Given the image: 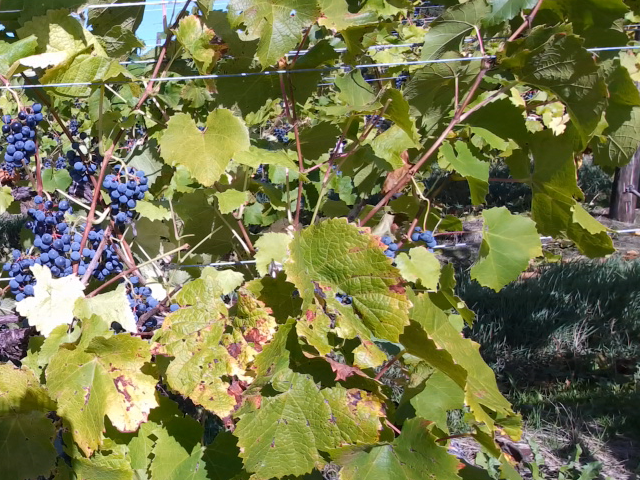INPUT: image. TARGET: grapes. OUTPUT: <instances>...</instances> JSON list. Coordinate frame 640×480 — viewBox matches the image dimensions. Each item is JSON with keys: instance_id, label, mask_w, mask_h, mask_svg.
<instances>
[{"instance_id": "1", "label": "grapes", "mask_w": 640, "mask_h": 480, "mask_svg": "<svg viewBox=\"0 0 640 480\" xmlns=\"http://www.w3.org/2000/svg\"><path fill=\"white\" fill-rule=\"evenodd\" d=\"M59 211L53 214L45 213L41 209H30L28 215L34 218V221H26L24 228L32 231L35 235L33 245L40 247L41 253L39 257L31 259L19 260L22 252L19 249L11 251L12 258L19 260L18 262H5L1 265L3 271H9L8 275L12 278L7 282L10 292L16 295L18 302L24 301L26 295L34 293L33 287L36 280L31 272H25L31 269L35 264L45 265L50 269V273L55 277H65L71 275L73 261L81 259L80 244L82 236L75 233L69 234V225L66 222H58V219L64 217V212L72 214L74 209L68 201H61L58 204Z\"/></svg>"}, {"instance_id": "2", "label": "grapes", "mask_w": 640, "mask_h": 480, "mask_svg": "<svg viewBox=\"0 0 640 480\" xmlns=\"http://www.w3.org/2000/svg\"><path fill=\"white\" fill-rule=\"evenodd\" d=\"M42 110L43 104L34 102L31 105V111L34 114H29L27 110H21L17 114V118L25 122V125L13 123L11 129L14 133L7 136L6 142L9 145L6 147L3 160L7 162L10 168H21L23 165L28 167L30 165L31 156L37 152L35 141L32 139L36 136L34 127L37 122L43 120Z\"/></svg>"}, {"instance_id": "3", "label": "grapes", "mask_w": 640, "mask_h": 480, "mask_svg": "<svg viewBox=\"0 0 640 480\" xmlns=\"http://www.w3.org/2000/svg\"><path fill=\"white\" fill-rule=\"evenodd\" d=\"M127 172L131 176H136L137 180L129 182H120L113 174H107L103 178L101 186L109 192V203L112 213L116 215L115 222L124 224L127 217L132 218L135 215L133 211L137 207V200L142 201L145 198V192L150 188L149 178L144 170L129 167Z\"/></svg>"}, {"instance_id": "4", "label": "grapes", "mask_w": 640, "mask_h": 480, "mask_svg": "<svg viewBox=\"0 0 640 480\" xmlns=\"http://www.w3.org/2000/svg\"><path fill=\"white\" fill-rule=\"evenodd\" d=\"M115 248L120 249V245L118 243H114V247L113 245H105L103 247L105 259L107 260V262L105 263V268L99 271L98 269L99 267H101V263H97L95 269L92 271V274L96 276V279L98 281H103L113 272L120 273L123 270V263L119 261V257L117 255L113 254L115 252Z\"/></svg>"}, {"instance_id": "5", "label": "grapes", "mask_w": 640, "mask_h": 480, "mask_svg": "<svg viewBox=\"0 0 640 480\" xmlns=\"http://www.w3.org/2000/svg\"><path fill=\"white\" fill-rule=\"evenodd\" d=\"M134 294L136 296H143L145 297L146 303L144 304L142 300L140 299H134L133 298V293L129 292L126 295V298L129 300V305L131 307H137V309L134 311V319L136 321L140 320V311H151L153 310L155 307H157L159 305V299L158 298H154L153 296H151L153 294V290L150 287H135L134 288Z\"/></svg>"}, {"instance_id": "6", "label": "grapes", "mask_w": 640, "mask_h": 480, "mask_svg": "<svg viewBox=\"0 0 640 480\" xmlns=\"http://www.w3.org/2000/svg\"><path fill=\"white\" fill-rule=\"evenodd\" d=\"M67 157L69 158V164L73 167L69 170V174L74 182L86 184L89 181V177L84 172L87 170L89 173H95L98 170L96 163H90L86 166L74 150H69Z\"/></svg>"}, {"instance_id": "7", "label": "grapes", "mask_w": 640, "mask_h": 480, "mask_svg": "<svg viewBox=\"0 0 640 480\" xmlns=\"http://www.w3.org/2000/svg\"><path fill=\"white\" fill-rule=\"evenodd\" d=\"M414 233L411 235V239L415 242L424 241L428 246L427 251L429 253H434L439 244V239L434 237L433 232L430 229H425L421 226H416L414 228Z\"/></svg>"}, {"instance_id": "8", "label": "grapes", "mask_w": 640, "mask_h": 480, "mask_svg": "<svg viewBox=\"0 0 640 480\" xmlns=\"http://www.w3.org/2000/svg\"><path fill=\"white\" fill-rule=\"evenodd\" d=\"M380 240L389 248L384 251V254L389 258H394L396 256V252L399 249V245L396 242L392 243V238L389 235H382L380 237Z\"/></svg>"}, {"instance_id": "9", "label": "grapes", "mask_w": 640, "mask_h": 480, "mask_svg": "<svg viewBox=\"0 0 640 480\" xmlns=\"http://www.w3.org/2000/svg\"><path fill=\"white\" fill-rule=\"evenodd\" d=\"M105 233H106V230L104 228L98 229L97 231L92 230L88 235V239L90 241H93L92 245L94 247H98L100 245V242L104 238Z\"/></svg>"}]
</instances>
